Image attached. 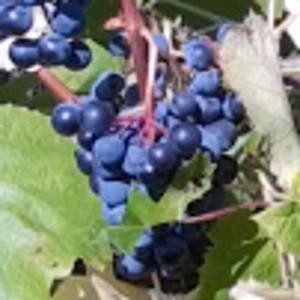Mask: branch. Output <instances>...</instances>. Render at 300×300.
<instances>
[{
  "label": "branch",
  "mask_w": 300,
  "mask_h": 300,
  "mask_svg": "<svg viewBox=\"0 0 300 300\" xmlns=\"http://www.w3.org/2000/svg\"><path fill=\"white\" fill-rule=\"evenodd\" d=\"M118 6L124 12V22L129 33L131 61L136 66L138 78V100L142 102L149 64L146 44L139 35V29L144 27L143 17L139 13V4L136 0H119Z\"/></svg>",
  "instance_id": "branch-1"
},
{
  "label": "branch",
  "mask_w": 300,
  "mask_h": 300,
  "mask_svg": "<svg viewBox=\"0 0 300 300\" xmlns=\"http://www.w3.org/2000/svg\"><path fill=\"white\" fill-rule=\"evenodd\" d=\"M34 75L42 81L50 92L56 96L63 104L68 106H79L81 99L77 97L64 81L52 73L46 66H37Z\"/></svg>",
  "instance_id": "branch-2"
}]
</instances>
